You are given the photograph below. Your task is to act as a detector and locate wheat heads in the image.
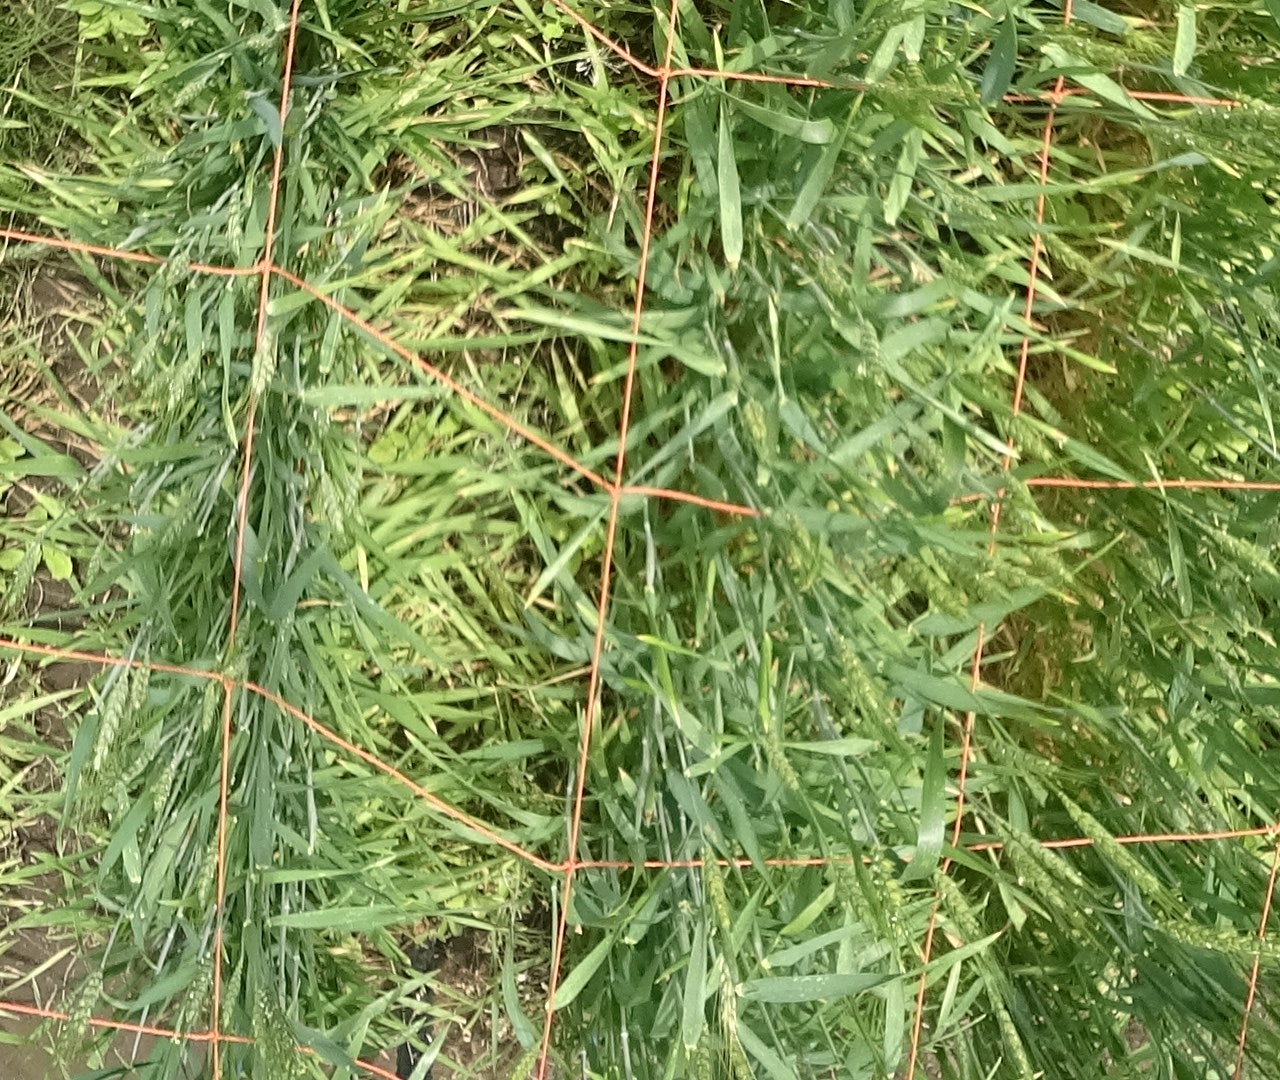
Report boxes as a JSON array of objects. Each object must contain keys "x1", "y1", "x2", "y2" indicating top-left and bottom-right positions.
[
  {"x1": 315, "y1": 471, "x2": 341, "y2": 532},
  {"x1": 1192, "y1": 807, "x2": 1231, "y2": 859},
  {"x1": 1179, "y1": 109, "x2": 1277, "y2": 136},
  {"x1": 842, "y1": 649, "x2": 871, "y2": 704},
  {"x1": 342, "y1": 468, "x2": 364, "y2": 515},
  {"x1": 122, "y1": 735, "x2": 166, "y2": 778},
  {"x1": 168, "y1": 347, "x2": 206, "y2": 394},
  {"x1": 974, "y1": 726, "x2": 1054, "y2": 774},
  {"x1": 729, "y1": 1031, "x2": 756, "y2": 1078},
  {"x1": 131, "y1": 334, "x2": 163, "y2": 373},
  {"x1": 951, "y1": 1023, "x2": 970, "y2": 1069},
  {"x1": 1000, "y1": 832, "x2": 1050, "y2": 899},
  {"x1": 996, "y1": 1005, "x2": 1028, "y2": 1074},
  {"x1": 860, "y1": 10, "x2": 923, "y2": 36},
  {"x1": 165, "y1": 246, "x2": 193, "y2": 279},
  {"x1": 220, "y1": 959, "x2": 248, "y2": 1020},
  {"x1": 858, "y1": 319, "x2": 890, "y2": 386},
  {"x1": 134, "y1": 658, "x2": 152, "y2": 702},
  {"x1": 694, "y1": 845, "x2": 733, "y2": 937},
  {"x1": 156, "y1": 759, "x2": 178, "y2": 813},
  {"x1": 196, "y1": 831, "x2": 227, "y2": 896},
  {"x1": 758, "y1": 725, "x2": 799, "y2": 783},
  {"x1": 1191, "y1": 522, "x2": 1271, "y2": 570},
  {"x1": 910, "y1": 427, "x2": 954, "y2": 479},
  {"x1": 29, "y1": 989, "x2": 76, "y2": 1042},
  {"x1": 228, "y1": 188, "x2": 243, "y2": 250},
  {"x1": 246, "y1": 326, "x2": 278, "y2": 388},
  {"x1": 94, "y1": 752, "x2": 123, "y2": 798},
  {"x1": 907, "y1": 559, "x2": 963, "y2": 620},
  {"x1": 740, "y1": 395, "x2": 768, "y2": 441},
  {"x1": 9, "y1": 532, "x2": 48, "y2": 605},
  {"x1": 165, "y1": 499, "x2": 196, "y2": 543},
  {"x1": 1207, "y1": 643, "x2": 1244, "y2": 695},
  {"x1": 1151, "y1": 921, "x2": 1273, "y2": 960},
  {"x1": 714, "y1": 959, "x2": 740, "y2": 1021},
  {"x1": 897, "y1": 59, "x2": 922, "y2": 87},
  {"x1": 819, "y1": 259, "x2": 853, "y2": 300},
  {"x1": 936, "y1": 252, "x2": 976, "y2": 286},
  {"x1": 1069, "y1": 804, "x2": 1154, "y2": 894},
  {"x1": 1070, "y1": 35, "x2": 1124, "y2": 63},
  {"x1": 1028, "y1": 542, "x2": 1077, "y2": 584},
  {"x1": 200, "y1": 679, "x2": 221, "y2": 731},
  {"x1": 175, "y1": 80, "x2": 208, "y2": 101},
  {"x1": 949, "y1": 194, "x2": 1000, "y2": 223},
  {"x1": 993, "y1": 504, "x2": 1037, "y2": 535},
  {"x1": 255, "y1": 980, "x2": 285, "y2": 1043},
  {"x1": 827, "y1": 845, "x2": 869, "y2": 930},
  {"x1": 932, "y1": 865, "x2": 974, "y2": 934},
  {"x1": 240, "y1": 32, "x2": 273, "y2": 55},
  {"x1": 873, "y1": 850, "x2": 900, "y2": 913},
  {"x1": 694, "y1": 1021, "x2": 711, "y2": 1079},
  {"x1": 997, "y1": 408, "x2": 1055, "y2": 461},
  {"x1": 82, "y1": 542, "x2": 107, "y2": 580},
  {"x1": 274, "y1": 607, "x2": 295, "y2": 646},
  {"x1": 95, "y1": 677, "x2": 126, "y2": 757},
  {"x1": 1128, "y1": 769, "x2": 1162, "y2": 804},
  {"x1": 1043, "y1": 226, "x2": 1103, "y2": 281},
  {"x1": 183, "y1": 953, "x2": 211, "y2": 1021},
  {"x1": 234, "y1": 610, "x2": 248, "y2": 647},
  {"x1": 77, "y1": 968, "x2": 106, "y2": 1029},
  {"x1": 787, "y1": 507, "x2": 813, "y2": 549},
  {"x1": 1137, "y1": 114, "x2": 1196, "y2": 158},
  {"x1": 862, "y1": 81, "x2": 971, "y2": 108}
]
